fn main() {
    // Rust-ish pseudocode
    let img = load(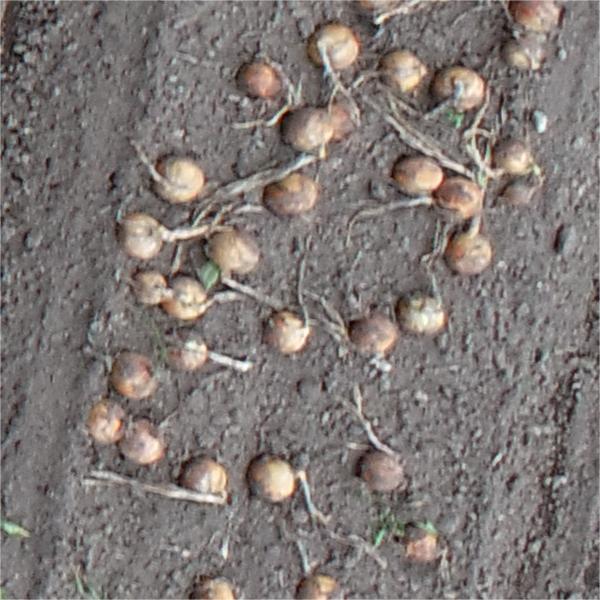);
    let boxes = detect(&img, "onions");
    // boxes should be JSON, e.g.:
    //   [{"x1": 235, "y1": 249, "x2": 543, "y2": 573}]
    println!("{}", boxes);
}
[
  {"x1": 121, "y1": 421, "x2": 163, "y2": 466},
  {"x1": 247, "y1": 455, "x2": 295, "y2": 501},
  {"x1": 109, "y1": 352, "x2": 154, "y2": 397},
  {"x1": 264, "y1": 171, "x2": 316, "y2": 216},
  {"x1": 153, "y1": 154, "x2": 203, "y2": 201},
  {"x1": 499, "y1": 175, "x2": 537, "y2": 208},
  {"x1": 401, "y1": 524, "x2": 439, "y2": 564},
  {"x1": 396, "y1": 290, "x2": 445, "y2": 335},
  {"x1": 446, "y1": 229, "x2": 492, "y2": 274},
  {"x1": 207, "y1": 228, "x2": 262, "y2": 276},
  {"x1": 266, "y1": 309, "x2": 307, "y2": 354},
  {"x1": 169, "y1": 332, "x2": 206, "y2": 371},
  {"x1": 324, "y1": 98, "x2": 360, "y2": 139},
  {"x1": 510, "y1": 0, "x2": 563, "y2": 32},
  {"x1": 193, "y1": 575, "x2": 240, "y2": 599},
  {"x1": 432, "y1": 67, "x2": 485, "y2": 111},
  {"x1": 287, "y1": 107, "x2": 331, "y2": 150},
  {"x1": 393, "y1": 155, "x2": 440, "y2": 195},
  {"x1": 496, "y1": 141, "x2": 533, "y2": 175},
  {"x1": 120, "y1": 214, "x2": 162, "y2": 258},
  {"x1": 359, "y1": 448, "x2": 404, "y2": 494},
  {"x1": 295, "y1": 570, "x2": 339, "y2": 599},
  {"x1": 180, "y1": 457, "x2": 227, "y2": 496},
  {"x1": 309, "y1": 25, "x2": 360, "y2": 69},
  {"x1": 86, "y1": 401, "x2": 129, "y2": 443},
  {"x1": 237, "y1": 60, "x2": 281, "y2": 99},
  {"x1": 504, "y1": 40, "x2": 540, "y2": 73},
  {"x1": 132, "y1": 268, "x2": 166, "y2": 303},
  {"x1": 436, "y1": 179, "x2": 480, "y2": 216},
  {"x1": 347, "y1": 312, "x2": 396, "y2": 356},
  {"x1": 164, "y1": 274, "x2": 208, "y2": 319},
  {"x1": 381, "y1": 47, "x2": 426, "y2": 95}
]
